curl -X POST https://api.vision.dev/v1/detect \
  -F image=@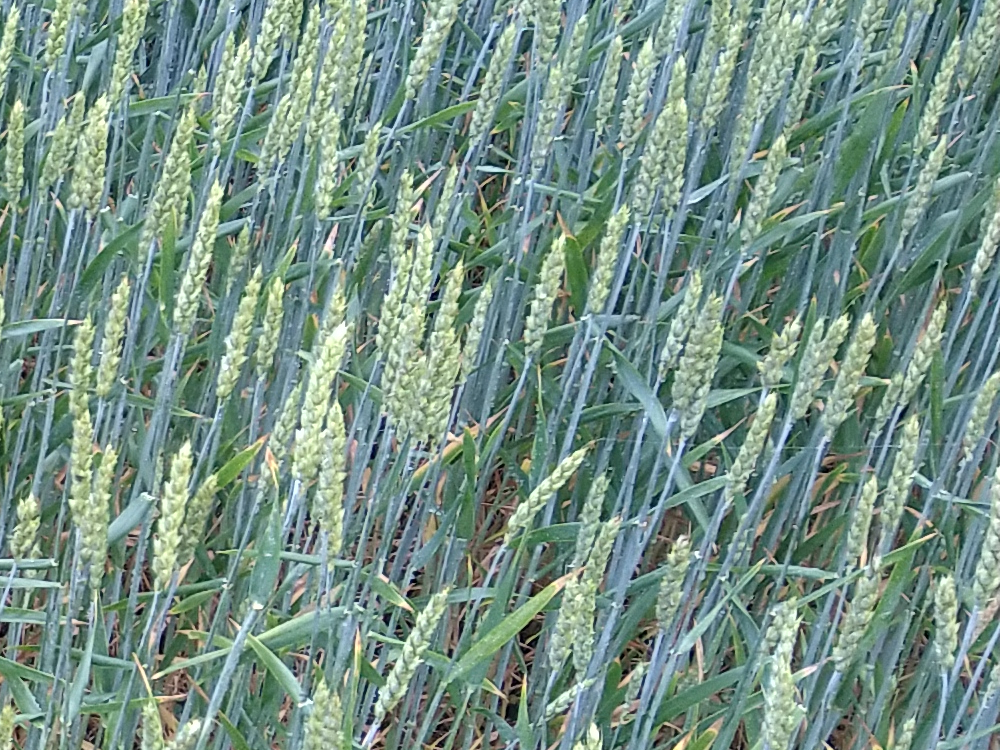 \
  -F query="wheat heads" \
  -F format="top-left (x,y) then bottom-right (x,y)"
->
top-left (757, 320), bottom-right (804, 384)
top-left (0, 9), bottom-right (21, 102)
top-left (339, 0), bottom-right (368, 108)
top-left (750, 0), bottom-right (786, 76)
top-left (506, 449), bottom-right (587, 544)
top-left (888, 718), bottom-right (917, 750)
top-left (791, 318), bottom-right (850, 417)
top-left (141, 703), bottom-right (166, 750)
top-left (134, 111), bottom-right (195, 269)
top-left (316, 125), bottom-right (342, 218)
top-left (655, 0), bottom-right (684, 42)
top-left (663, 55), bottom-right (687, 105)
top-left (218, 269), bottom-right (263, 397)
top-left (320, 688), bottom-right (344, 750)
top-left (535, 0), bottom-right (564, 60)
top-left (180, 477), bottom-right (219, 563)
top-left (64, 92), bottom-right (87, 159)
top-left (388, 315), bottom-right (427, 429)
top-left (657, 538), bottom-right (692, 628)
top-left (431, 261), bottom-right (465, 358)
top-left (761, 13), bottom-right (790, 88)
top-left (110, 3), bottom-right (140, 101)
top-left (529, 68), bottom-right (563, 175)
top-left (961, 374), bottom-right (1000, 455)
top-left (969, 183), bottom-right (1000, 295)
top-left (725, 394), bottom-right (779, 500)
top-left (257, 279), bottom-right (286, 375)
top-left (898, 304), bottom-right (949, 409)
top-left (227, 223), bottom-right (253, 293)
top-left (783, 0), bottom-right (804, 22)
top-left (308, 23), bottom-right (348, 141)
top-left (423, 338), bottom-right (462, 447)
top-left (266, 381), bottom-right (305, 473)
top-left (248, 0), bottom-right (292, 78)
top-left (672, 299), bottom-right (724, 427)
top-left (11, 497), bottom-right (41, 558)
top-left (659, 274), bottom-right (704, 373)
top-left (899, 137), bottom-right (950, 238)
top-left (935, 575), bottom-right (959, 667)
top-left (470, 26), bottom-right (518, 141)
top-left (80, 124), bottom-right (110, 212)
top-left (6, 101), bottom-right (25, 201)
top-left (127, 0), bottom-right (160, 54)
top-left (576, 474), bottom-right (610, 566)
top-left (757, 24), bottom-right (806, 115)
top-left (153, 445), bottom-right (194, 586)
top-left (294, 327), bottom-right (349, 479)
top-left (595, 38), bottom-right (623, 133)
top-left (383, 228), bottom-right (435, 400)
top-left (427, 0), bottom-right (451, 63)
top-left (283, 0), bottom-right (306, 30)
top-left (883, 9), bottom-right (909, 72)
top-left (48, 0), bottom-right (77, 60)
top-left (619, 42), bottom-right (656, 140)
top-left (763, 604), bottom-right (801, 750)
top-left (213, 31), bottom-right (235, 101)
top-left (741, 136), bottom-right (789, 245)
top-left (973, 469), bottom-right (1000, 612)
top-left (280, 71), bottom-right (315, 160)
top-left (846, 478), bottom-right (878, 564)
top-left (708, 0), bottom-right (731, 36)
top-left (560, 18), bottom-right (590, 98)
top-left (432, 165), bottom-right (459, 240)
top-left (173, 185), bottom-right (224, 333)
top-left (834, 565), bottom-right (880, 675)
top-left (98, 278), bottom-right (131, 395)
top-left (462, 283), bottom-right (494, 375)
top-left (730, 93), bottom-right (759, 174)
top-left (733, 0), bottom-right (759, 25)
top-left (315, 404), bottom-right (348, 555)
top-left (525, 235), bottom-right (569, 357)
top-left (913, 39), bottom-right (963, 149)
top-left (38, 125), bottom-right (86, 196)
top-left (154, 720), bottom-right (204, 750)
top-left (853, 0), bottom-right (906, 46)
top-left (587, 207), bottom-right (631, 313)
top-left (571, 521), bottom-right (620, 671)
top-left (613, 0), bottom-right (646, 21)
top-left (957, 0), bottom-right (1000, 88)
top-left (297, 683), bottom-right (329, 750)
top-left (781, 48), bottom-right (819, 136)
top-left (702, 29), bottom-right (742, 125)
top-left (666, 0), bottom-right (692, 40)
top-left (214, 43), bottom-right (253, 148)
top-left (825, 315), bottom-right (878, 427)
top-left (753, 600), bottom-right (795, 669)
top-left (71, 412), bottom-right (95, 519)
top-left (408, 0), bottom-right (473, 93)
top-left (257, 97), bottom-right (290, 183)
top-left (394, 350), bottom-right (431, 441)
top-left (357, 126), bottom-right (381, 193)
top-left (882, 417), bottom-right (921, 531)
top-left (88, 448), bottom-right (116, 588)
top-left (814, 0), bottom-right (895, 36)
top-left (70, 320), bottom-right (94, 416)
top-left (261, 124), bottom-right (307, 177)
top-left (631, 104), bottom-right (677, 218)
top-left (374, 591), bottom-right (451, 716)
top-left (661, 98), bottom-right (691, 211)
top-left (390, 170), bottom-right (415, 265)
top-left (548, 581), bottom-right (582, 668)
